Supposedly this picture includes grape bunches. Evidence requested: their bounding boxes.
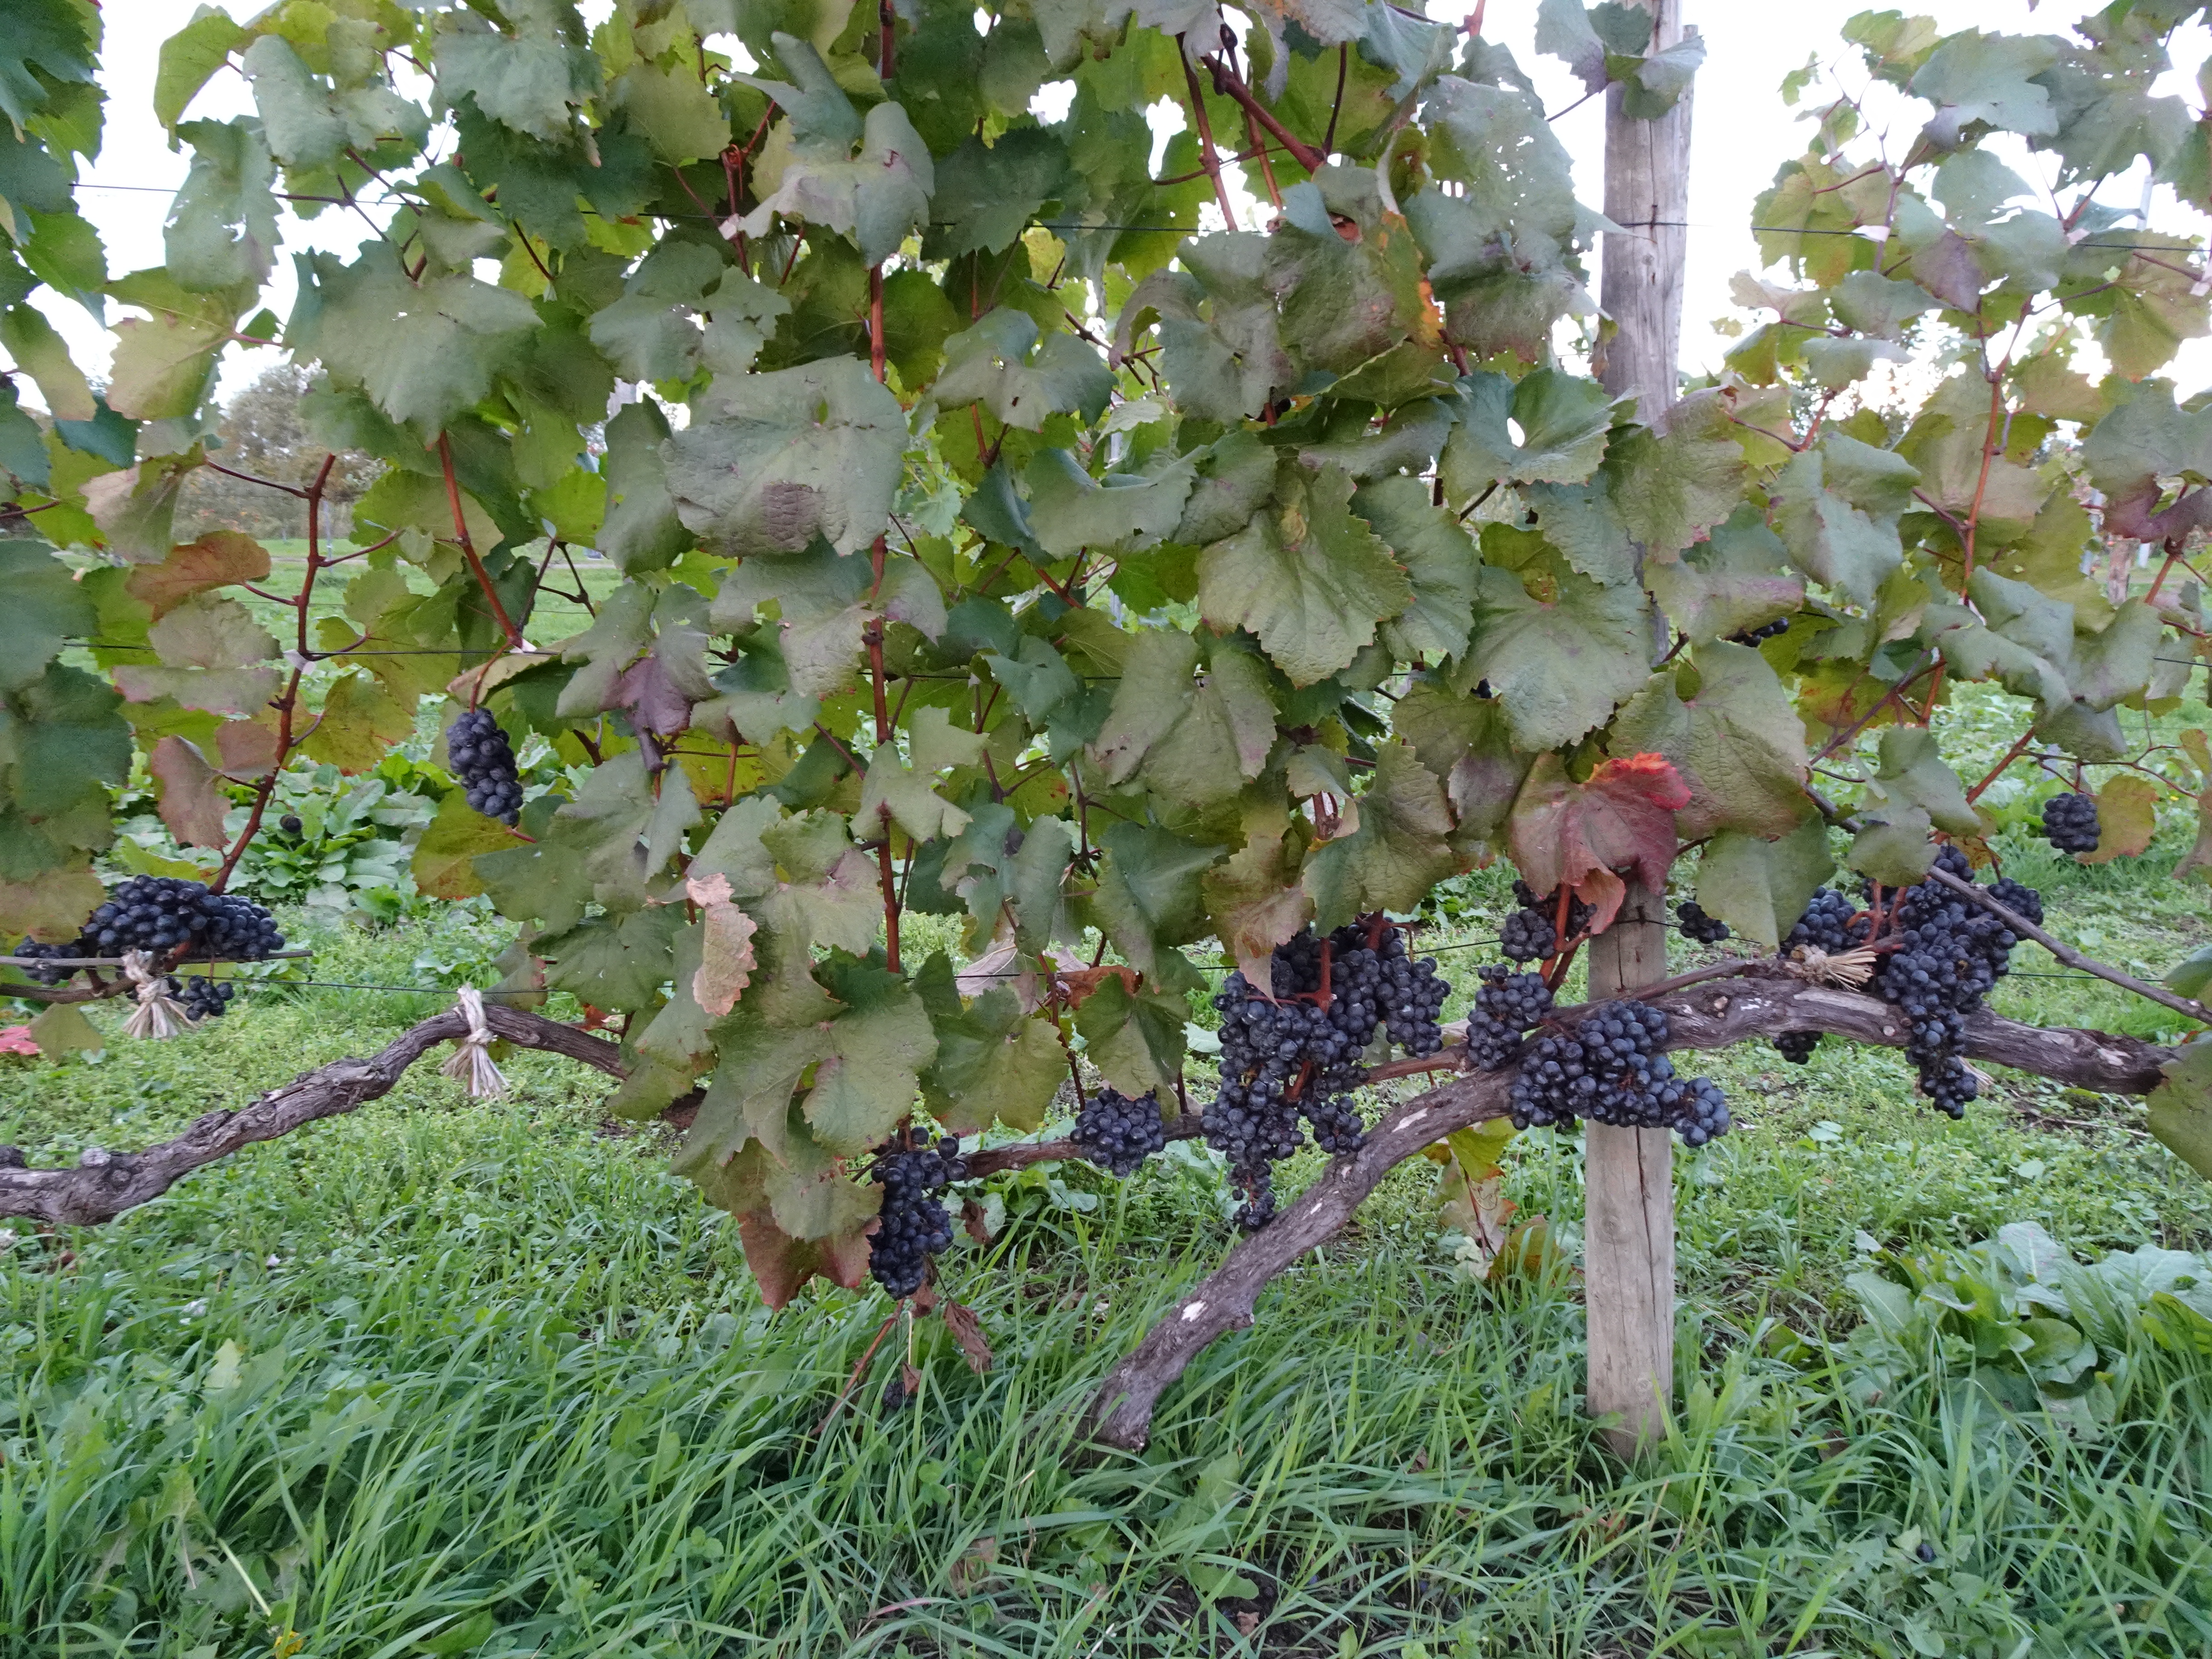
[866,1127,970,1303]
[1906,905,2017,1016]
[872,1372,924,1409]
[85,873,288,962]
[1779,881,1877,962]
[178,977,234,1020]
[994,817,1039,860]
[1297,1094,1372,1159]
[1769,1027,1825,1068]
[1207,957,1291,1120]
[445,707,526,829]
[1888,842,1977,945]
[1465,959,1555,1074]
[1199,1102,1302,1234]
[1068,1085,1168,1180]
[271,801,307,836]
[1497,878,1589,962]
[1336,914,1404,1007]
[1301,1005,1371,1104]
[1674,893,1734,950]
[1726,613,1792,653]
[1229,999,1307,1109]
[1874,948,1981,1121]
[1508,1037,1597,1133]
[1590,1076,1736,1152]
[1285,929,1336,998]
[2039,785,2109,855]
[1372,947,1453,1060]
[22,929,89,987]
[1575,995,1683,1098]
[1250,382,1295,426]
[1978,877,2045,947]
